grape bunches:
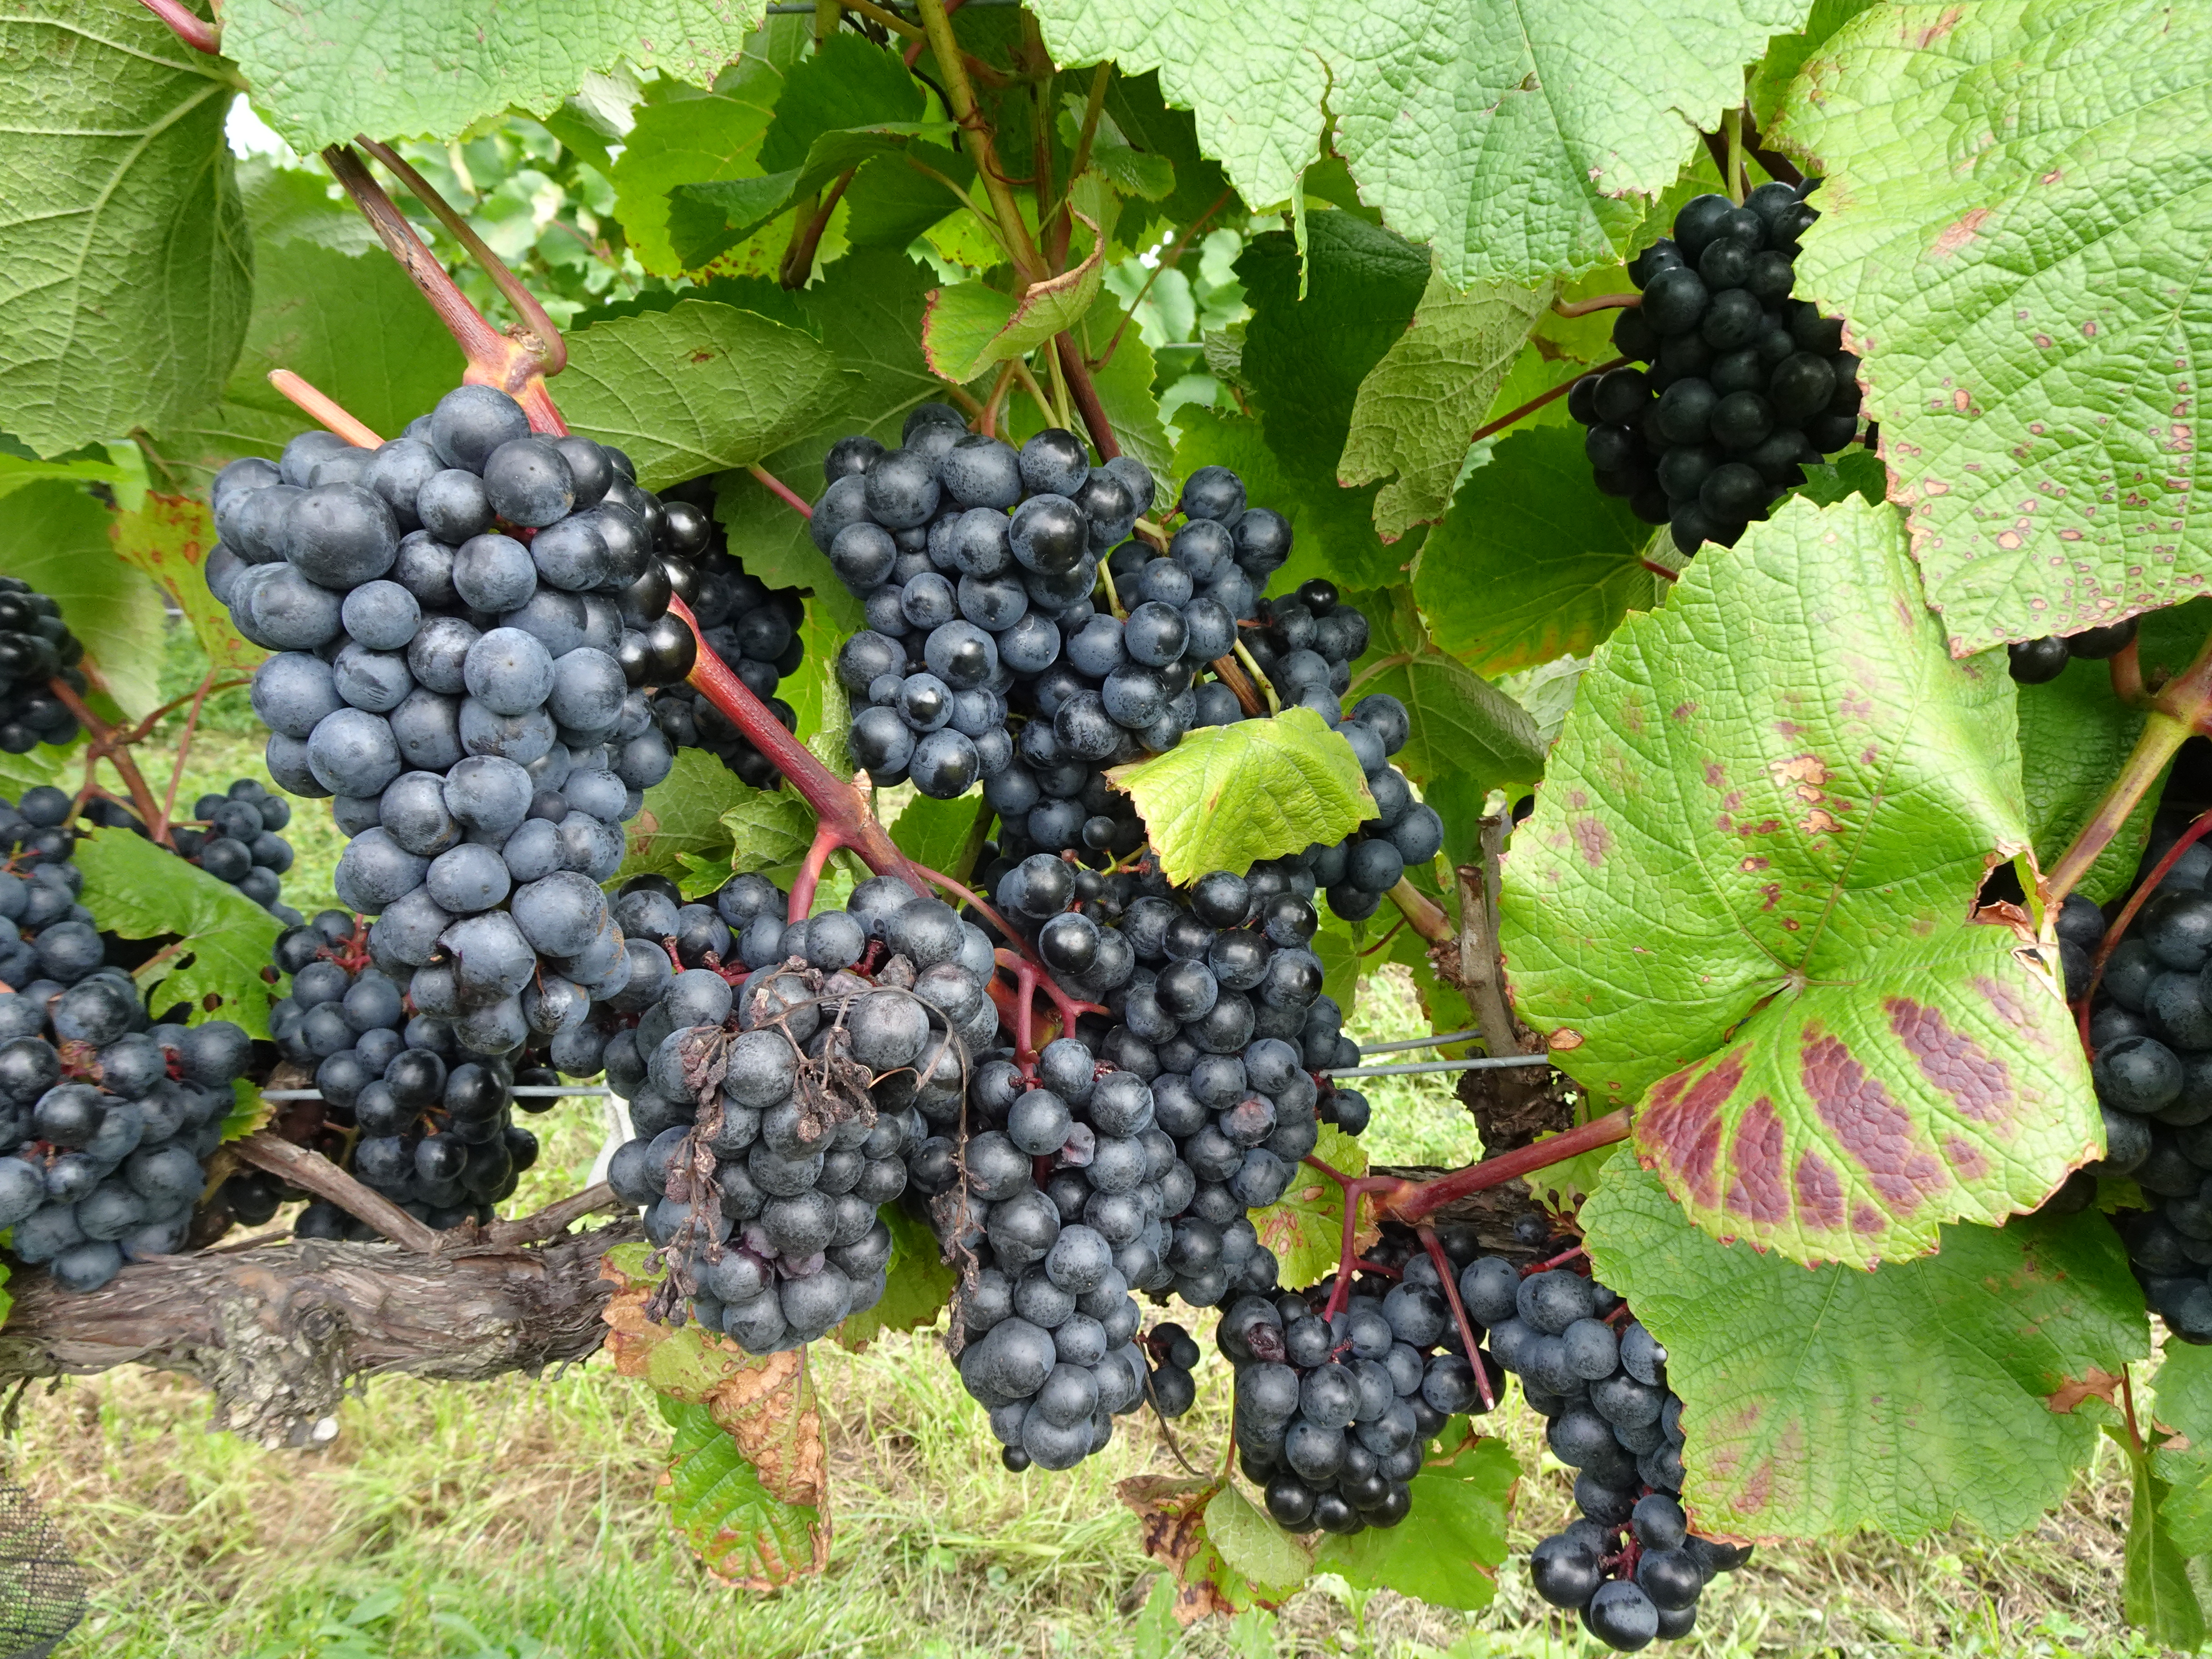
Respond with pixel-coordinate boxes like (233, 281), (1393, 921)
(170, 770), (295, 910)
(1567, 178), (1879, 555)
(2043, 828), (2212, 1342)
(1056, 471), (1296, 764)
(1108, 1321), (1202, 1415)
(0, 575), (88, 754)
(1461, 1209), (1754, 1651)
(174, 1164), (306, 1250)
(1217, 1228), (1507, 1536)
(601, 871), (1001, 1355)
(1098, 870), (1367, 1299)
(204, 385), (697, 1056)
(909, 1027), (1196, 1470)
(809, 401), (1158, 800)
(2010, 617), (2137, 684)
(647, 501), (803, 791)
(1232, 576), (1443, 919)
(957, 760), (1177, 997)
(272, 905), (562, 1238)
(0, 782), (249, 1297)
